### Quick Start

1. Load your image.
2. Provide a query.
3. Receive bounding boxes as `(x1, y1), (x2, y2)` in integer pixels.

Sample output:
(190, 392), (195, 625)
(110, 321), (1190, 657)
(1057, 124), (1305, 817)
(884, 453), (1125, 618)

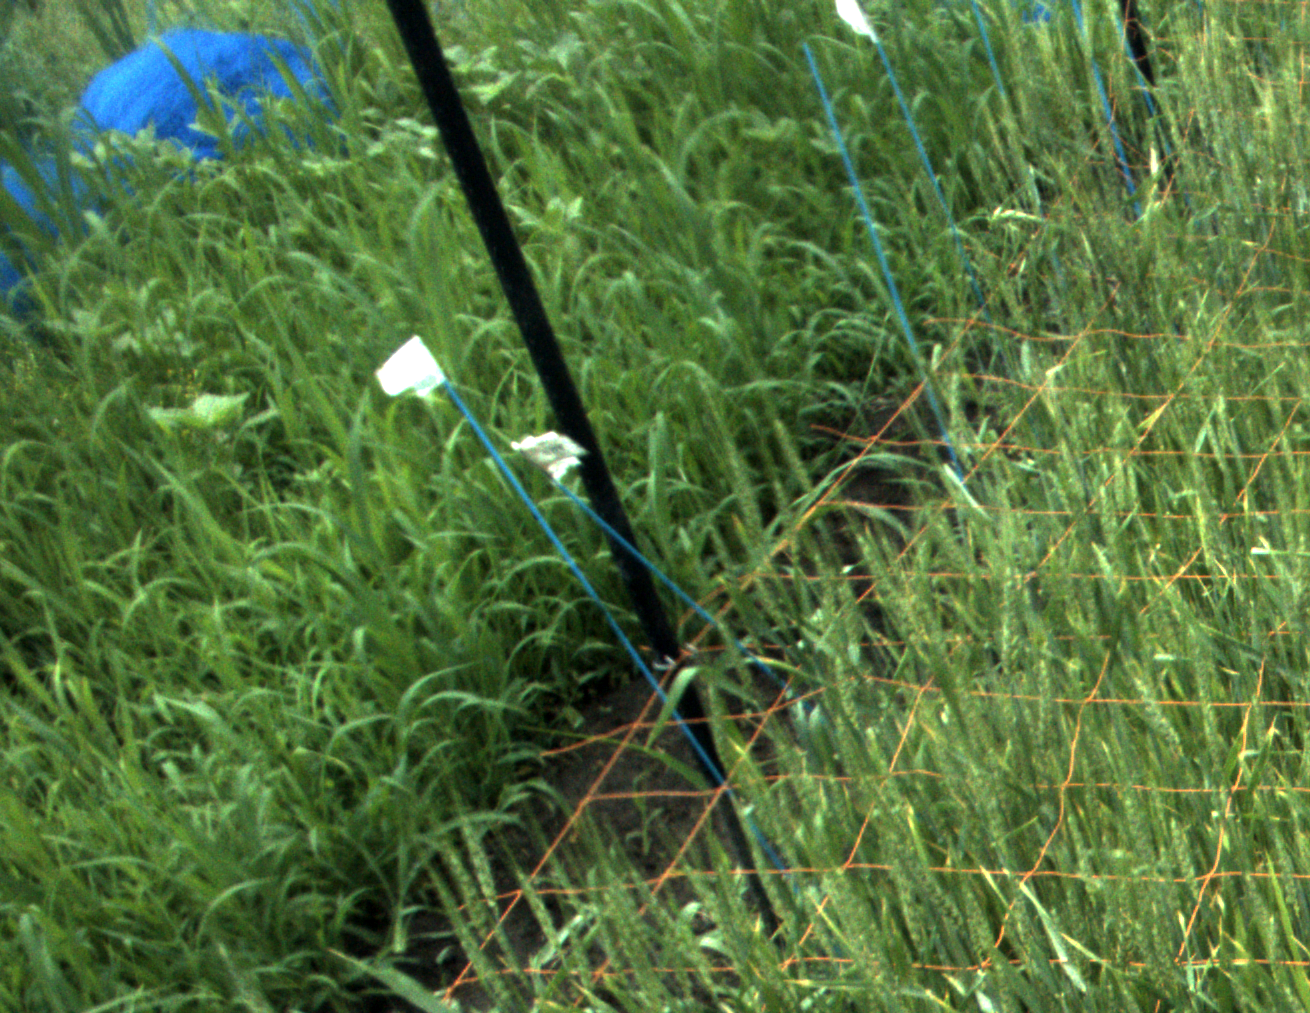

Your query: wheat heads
(456, 925), (522, 1013)
(986, 114), (1014, 173)
(993, 961), (1025, 1013)
(1035, 975), (1055, 1013)
(1193, 492), (1218, 573)
(999, 565), (1023, 673)
(1131, 675), (1181, 744)
(1264, 765), (1278, 788)
(988, 157), (1009, 206)
(1258, 320), (1281, 352)
(567, 925), (597, 992)
(1166, 117), (1194, 168)
(1292, 528), (1310, 622)
(604, 863), (652, 937)
(1248, 693), (1269, 746)
(1034, 659), (1050, 755)
(1230, 971), (1257, 1013)
(493, 923), (520, 974)
(1115, 881), (1138, 968)
(626, 864), (715, 986)
(897, 841), (973, 929)
(974, 240), (1003, 293)
(460, 818), (497, 906)
(913, 777), (952, 843)
(916, 600), (949, 655)
(772, 739), (800, 774)
(1292, 277), (1307, 325)
(1220, 865), (1238, 905)
(1081, 721), (1115, 785)
(218, 943), (291, 1013)
(880, 754), (907, 807)
(998, 280), (1024, 318)
(1101, 459), (1117, 494)
(1112, 452), (1128, 509)
(1175, 350), (1208, 413)
(1142, 120), (1162, 179)
(1126, 462), (1140, 503)
(1043, 464), (1071, 513)
(447, 846), (490, 935)
(613, 897), (656, 988)
(1065, 815), (1103, 895)
(1184, 305), (1221, 387)
(1097, 484), (1118, 550)
(1067, 416), (1084, 460)
(831, 653), (864, 729)
(525, 999), (546, 1013)
(709, 533), (737, 587)
(1131, 869), (1155, 917)
(1079, 756), (1102, 827)
(1169, 814), (1200, 897)
(1281, 65), (1300, 123)
(1104, 980), (1121, 1013)
(1004, 864), (1032, 935)
(697, 882), (753, 970)
(935, 737), (974, 808)
(1289, 63), (1300, 99)
(1190, 645), (1224, 758)
(1123, 790), (1160, 865)
(1230, 150), (1253, 218)
(995, 89), (1028, 158)
(1273, 836), (1301, 906)
(1149, 873), (1182, 943)
(1019, 339), (1033, 381)
(1037, 350), (1051, 370)
(1050, 905), (1067, 937)
(969, 762), (1011, 849)
(1218, 390), (1233, 447)
(837, 581), (865, 645)
(1105, 213), (1134, 279)
(1258, 980), (1279, 1013)
(772, 478), (802, 561)
(947, 431), (977, 475)
(1276, 427), (1294, 474)
(1281, 984), (1310, 1013)
(948, 373), (961, 433)
(600, 930), (630, 983)
(811, 554), (843, 650)
(1212, 55), (1233, 114)
(1274, 474), (1296, 548)
(773, 416), (811, 493)
(715, 619), (754, 689)
(752, 939), (798, 1003)
(1173, 50), (1198, 101)
(855, 527), (917, 637)
(964, 142), (985, 184)
(1145, 769), (1170, 835)
(751, 843), (789, 919)
(834, 715), (862, 775)
(1106, 418), (1124, 450)
(1247, 871), (1273, 932)
(1201, 454), (1215, 487)
(998, 700), (1020, 735)
(1133, 918), (1168, 992)
(722, 439), (766, 547)
(1283, 329), (1306, 368)
(934, 520), (977, 585)
(1194, 467), (1235, 556)
(1302, 723), (1310, 783)
(1293, 353), (1310, 385)
(890, 858), (927, 951)
(961, 887), (995, 951)
(732, 760), (772, 829)
(1182, 37), (1220, 140)
(1100, 872), (1123, 919)
(863, 771), (909, 840)
(1022, 705), (1050, 766)
(1246, 415), (1259, 446)
(1100, 139), (1122, 196)
(789, 771), (835, 826)
(753, 571), (790, 631)
(1085, 51), (1111, 136)
(1108, 50), (1133, 115)
(760, 781), (798, 856)
(1054, 453), (1086, 500)
(1209, 762), (1227, 813)
(802, 896), (832, 952)
(1063, 893), (1094, 985)
(1012, 26), (1083, 167)
(1263, 915), (1280, 974)
(1123, 985), (1153, 1013)
(968, 906), (982, 956)
(1145, 590), (1190, 657)
(825, 878), (906, 1002)
(1077, 570), (1101, 636)
(1260, 378), (1282, 424)
(513, 868), (562, 952)
(1233, 25), (1250, 119)
(1207, 423), (1229, 470)
(707, 682), (729, 770)
(911, 538), (932, 598)
(955, 675), (990, 754)
(1151, 923), (1180, 980)
(988, 744), (1009, 809)
(1079, 404), (1090, 451)
(827, 774), (854, 831)
(1296, 383), (1310, 427)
